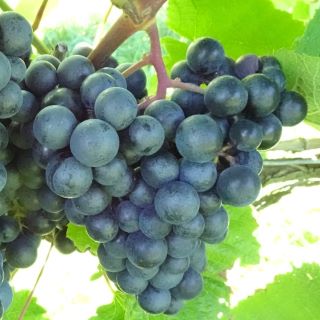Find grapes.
Returning a JSON list of instances; mask_svg holds the SVG:
<instances>
[{
    "mask_svg": "<svg viewBox=\"0 0 320 320\" xmlns=\"http://www.w3.org/2000/svg\"><path fill=\"white\" fill-rule=\"evenodd\" d=\"M33 40L22 14H0V318L12 302L9 272L35 262L41 236L55 230L59 251H75L69 223L100 244L118 290L146 312L178 313L202 289L204 241L227 235L222 204L258 198L257 150L305 119V97L283 90L275 57L234 61L198 37L168 75L205 95L178 89L137 110L143 68L124 79L135 63L110 55L96 72L85 41L69 56L60 42L54 56L29 60Z\"/></svg>",
    "mask_w": 320,
    "mask_h": 320,
    "instance_id": "1",
    "label": "grapes"
}]
</instances>
